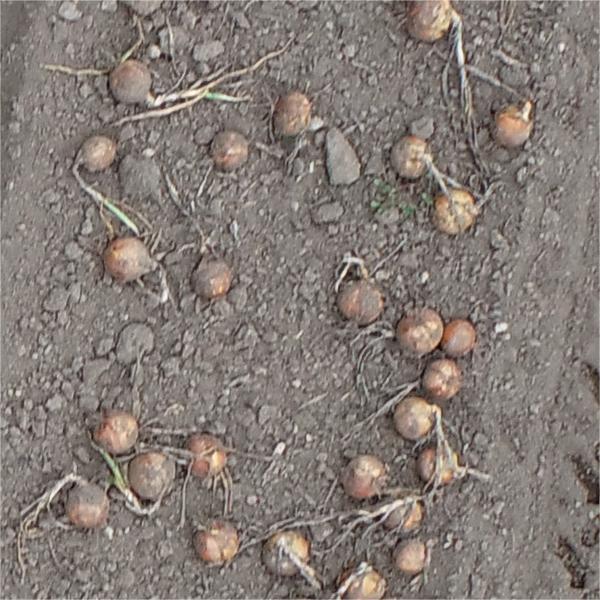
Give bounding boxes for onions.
[389,134,429,175]
[193,519,237,562]
[104,234,149,280]
[420,357,461,399]
[270,90,311,136]
[433,188,475,233]
[397,308,443,353]
[439,318,475,355]
[77,134,114,171]
[416,446,455,486]
[492,103,529,146]
[263,528,314,580]
[94,409,136,454]
[336,280,384,324]
[402,1,454,42]
[387,497,422,531]
[393,397,434,438]
[66,480,108,527]
[191,254,233,298]
[208,130,246,171]
[339,563,385,598]
[129,452,171,498]
[339,453,384,500]
[109,60,149,104]
[184,437,223,478]
[392,540,425,574]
